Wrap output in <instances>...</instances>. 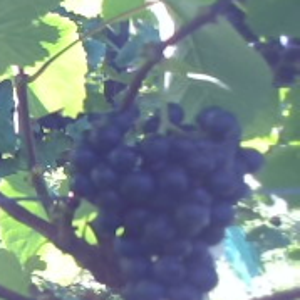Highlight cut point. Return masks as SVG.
I'll use <instances>...</instances> for the list:
<instances>
[{"label": "cut point", "instance_id": "obj_1", "mask_svg": "<svg viewBox=\"0 0 300 300\" xmlns=\"http://www.w3.org/2000/svg\"><path fill=\"white\" fill-rule=\"evenodd\" d=\"M177 52V47L167 50L164 54V88H163V102L169 104L172 97L173 89V64L174 57Z\"/></svg>", "mask_w": 300, "mask_h": 300}]
</instances>
